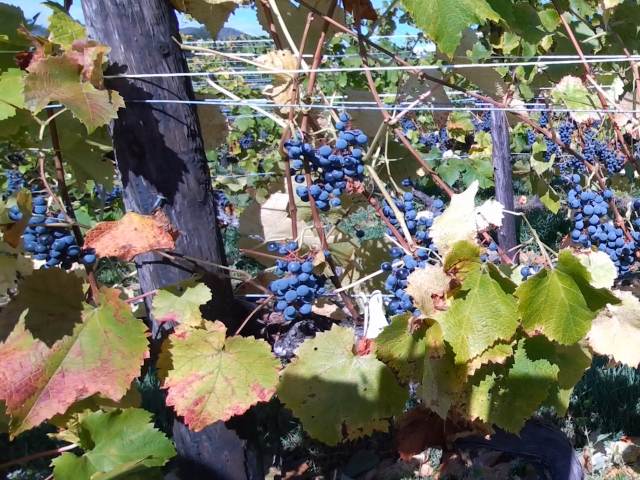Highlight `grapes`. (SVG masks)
Here are the masks:
<instances>
[{
    "instance_id": "01657485",
    "label": "grapes",
    "mask_w": 640,
    "mask_h": 480,
    "mask_svg": "<svg viewBox=\"0 0 640 480\" xmlns=\"http://www.w3.org/2000/svg\"><path fill=\"white\" fill-rule=\"evenodd\" d=\"M571 181L576 184L567 193V200L571 208L580 209L582 212L574 214V227L571 230V241L583 244L586 248L592 246V241L601 242L597 247L599 252L608 254L619 268L618 274L625 276L630 273L631 264L635 261V249L640 241V232L630 230L634 240L624 239L622 228L611 225L608 222L600 223V218L608 213V203L605 201L613 198L611 189H604L597 194L595 190L582 191L581 178L574 174Z\"/></svg>"
},
{
    "instance_id": "ef6de9ee",
    "label": "grapes",
    "mask_w": 640,
    "mask_h": 480,
    "mask_svg": "<svg viewBox=\"0 0 640 480\" xmlns=\"http://www.w3.org/2000/svg\"><path fill=\"white\" fill-rule=\"evenodd\" d=\"M385 216L387 217V219L394 225L396 226L398 224V219L396 218V214H395V210L393 208H391V206L388 204L387 200L383 201V208H382Z\"/></svg>"
},
{
    "instance_id": "84f90ec7",
    "label": "grapes",
    "mask_w": 640,
    "mask_h": 480,
    "mask_svg": "<svg viewBox=\"0 0 640 480\" xmlns=\"http://www.w3.org/2000/svg\"><path fill=\"white\" fill-rule=\"evenodd\" d=\"M22 247L25 251H32L33 258L45 261L42 270H48L50 266L58 265L65 250V257H79L85 264H93L96 261V249L82 250L80 245L74 244L76 239L69 232L61 229L48 231L43 226L25 227L22 234Z\"/></svg>"
},
{
    "instance_id": "5460f4e3",
    "label": "grapes",
    "mask_w": 640,
    "mask_h": 480,
    "mask_svg": "<svg viewBox=\"0 0 640 480\" xmlns=\"http://www.w3.org/2000/svg\"><path fill=\"white\" fill-rule=\"evenodd\" d=\"M403 199L405 201L397 200L395 197L391 198L392 203L404 211V217L407 219L406 226L407 230L415 235L417 240H425L429 239L428 233L426 231H417L418 226H425L426 228H430L433 224V220L431 218L420 217L416 219V210L414 209V197L411 193H405L403 195Z\"/></svg>"
},
{
    "instance_id": "b958b902",
    "label": "grapes",
    "mask_w": 640,
    "mask_h": 480,
    "mask_svg": "<svg viewBox=\"0 0 640 480\" xmlns=\"http://www.w3.org/2000/svg\"><path fill=\"white\" fill-rule=\"evenodd\" d=\"M295 137L284 143L287 157L292 160L294 167L288 171V174L295 176L297 174L295 169H302L303 160L299 154L304 153V156L312 162L309 166L311 172H314L317 167L324 170L322 183L325 185L321 187L314 184L309 189L297 186L295 195L300 197L302 202H307V197L312 195L316 207L322 211H328L330 203L333 207H338L341 204L338 197L343 195L342 190L347 186V182L343 178L344 175L353 176L357 181L364 179V166L361 161L363 151L356 147L350 151V154L342 156L341 154H333V149L330 146L323 145L316 149L312 144L304 143L303 135L300 132H297Z\"/></svg>"
},
{
    "instance_id": "2adb6a1f",
    "label": "grapes",
    "mask_w": 640,
    "mask_h": 480,
    "mask_svg": "<svg viewBox=\"0 0 640 480\" xmlns=\"http://www.w3.org/2000/svg\"><path fill=\"white\" fill-rule=\"evenodd\" d=\"M298 248L297 242H288L287 244H280L279 242H269L266 245L267 251L276 252L278 255H287L288 251H296Z\"/></svg>"
},
{
    "instance_id": "0513c4c2",
    "label": "grapes",
    "mask_w": 640,
    "mask_h": 480,
    "mask_svg": "<svg viewBox=\"0 0 640 480\" xmlns=\"http://www.w3.org/2000/svg\"><path fill=\"white\" fill-rule=\"evenodd\" d=\"M314 258L307 257L304 262L284 261L276 258L274 265L277 268L276 275H283L287 272L297 275L289 278H277L268 283L270 293H277L274 300L277 302L275 311H283L285 322L293 321L297 312L300 315H309L312 310V303L315 296L326 291L321 287L318 277L313 274Z\"/></svg>"
},
{
    "instance_id": "f8a65327",
    "label": "grapes",
    "mask_w": 640,
    "mask_h": 480,
    "mask_svg": "<svg viewBox=\"0 0 640 480\" xmlns=\"http://www.w3.org/2000/svg\"><path fill=\"white\" fill-rule=\"evenodd\" d=\"M417 256L420 261H416L413 255L405 254L404 250L400 247H392L389 249V257L394 258L391 263L383 261L380 264V270L384 273H391L387 275V279L384 280V287L387 292H393L394 297L392 301L387 302V308L390 311H395L397 315L410 313L413 317L421 314L420 310H416L413 305V299L410 295L405 294L404 288L409 284L407 278L415 267L419 269H425L426 263L430 261L428 251L424 248L417 250ZM400 257H403V263L405 267L399 266L392 267L391 265L401 262Z\"/></svg>"
},
{
    "instance_id": "e5b3c951",
    "label": "grapes",
    "mask_w": 640,
    "mask_h": 480,
    "mask_svg": "<svg viewBox=\"0 0 640 480\" xmlns=\"http://www.w3.org/2000/svg\"><path fill=\"white\" fill-rule=\"evenodd\" d=\"M33 213L35 216L28 218V224H59V219L45 218V213L47 211V205L44 204V197L39 196L33 199Z\"/></svg>"
},
{
    "instance_id": "83cd7487",
    "label": "grapes",
    "mask_w": 640,
    "mask_h": 480,
    "mask_svg": "<svg viewBox=\"0 0 640 480\" xmlns=\"http://www.w3.org/2000/svg\"><path fill=\"white\" fill-rule=\"evenodd\" d=\"M349 120L350 115L347 112H342L339 118L340 122L334 124V127L340 131L339 138L334 141V148L336 150H344L349 143L358 145L368 141V135L363 129L352 128L350 131L346 130Z\"/></svg>"
}]
</instances>
